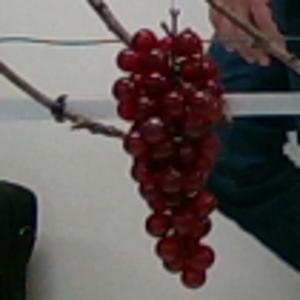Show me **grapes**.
<instances>
[{
	"label": "grapes",
	"instance_id": "1",
	"mask_svg": "<svg viewBox=\"0 0 300 300\" xmlns=\"http://www.w3.org/2000/svg\"><path fill=\"white\" fill-rule=\"evenodd\" d=\"M205 51L195 30L159 38L152 28H139L115 58L128 77L110 86L116 115L133 122L121 147L129 156L130 180L146 200V232L160 239L155 257L168 274H181L191 291L205 287L206 269L216 260L213 247L201 243L212 234L206 215L217 205L205 187L224 147L227 118L226 91Z\"/></svg>",
	"mask_w": 300,
	"mask_h": 300
}]
</instances>
